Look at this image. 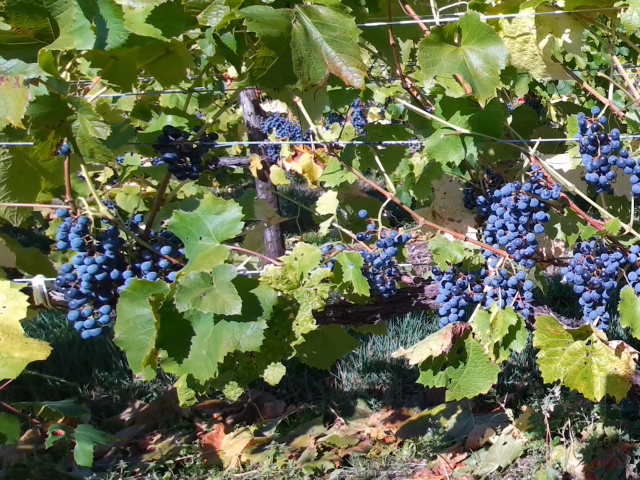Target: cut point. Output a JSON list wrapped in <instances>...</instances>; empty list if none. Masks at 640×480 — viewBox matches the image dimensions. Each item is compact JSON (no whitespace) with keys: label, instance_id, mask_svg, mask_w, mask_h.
Masks as SVG:
<instances>
[{"label":"cut point","instance_id":"cut-point-1","mask_svg":"<svg viewBox=\"0 0 640 480\" xmlns=\"http://www.w3.org/2000/svg\"><path fill=\"white\" fill-rule=\"evenodd\" d=\"M72 198H73L74 201H81L82 203H84L85 212L87 214L91 213L90 203L84 196H72Z\"/></svg>","mask_w":640,"mask_h":480},{"label":"cut point","instance_id":"cut-point-2","mask_svg":"<svg viewBox=\"0 0 640 480\" xmlns=\"http://www.w3.org/2000/svg\"><path fill=\"white\" fill-rule=\"evenodd\" d=\"M392 202V200L388 197L383 204L380 206L379 210H378V215L382 216L386 207L389 205V203Z\"/></svg>","mask_w":640,"mask_h":480},{"label":"cut point","instance_id":"cut-point-3","mask_svg":"<svg viewBox=\"0 0 640 480\" xmlns=\"http://www.w3.org/2000/svg\"><path fill=\"white\" fill-rule=\"evenodd\" d=\"M530 161L525 159L522 164H521V169H520V174L519 177L520 178H524L525 177V172H526V166Z\"/></svg>","mask_w":640,"mask_h":480},{"label":"cut point","instance_id":"cut-point-4","mask_svg":"<svg viewBox=\"0 0 640 480\" xmlns=\"http://www.w3.org/2000/svg\"><path fill=\"white\" fill-rule=\"evenodd\" d=\"M423 226H424V224L419 222L418 224H416V225H414V226L410 227V228H409V231H410V232H414V231H416V230H418V229L422 228Z\"/></svg>","mask_w":640,"mask_h":480}]
</instances>
